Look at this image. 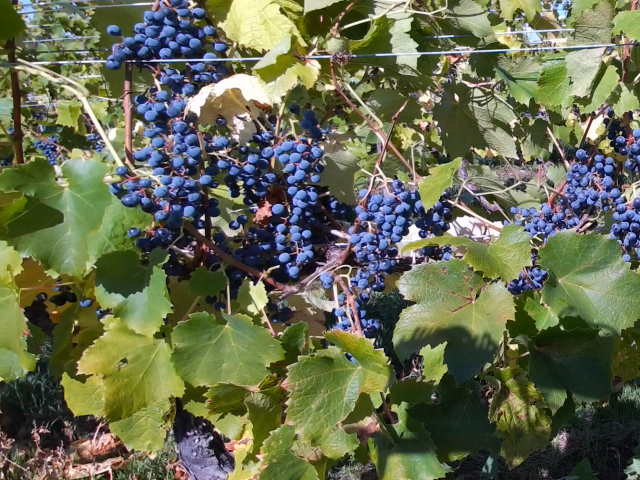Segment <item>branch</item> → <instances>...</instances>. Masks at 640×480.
<instances>
[{
    "label": "branch",
    "mask_w": 640,
    "mask_h": 480,
    "mask_svg": "<svg viewBox=\"0 0 640 480\" xmlns=\"http://www.w3.org/2000/svg\"><path fill=\"white\" fill-rule=\"evenodd\" d=\"M328 72L330 81L333 84L334 89L336 90L341 101L348 106L351 110L357 113L364 122L374 131L377 135L383 140L382 146L377 153L376 162L372 170V174L377 176L381 170L384 156L388 149L394 154L396 158L399 159L400 163L403 165V168L417 181L420 182L422 180V176L415 171V169L410 165L409 161L406 157L397 149L396 145L392 142V134L394 125L402 116V113L407 108V106L412 101L410 96H406L404 100L401 102L400 106L397 110L391 115L387 122L386 132H384L366 113L365 111L358 105H356L353 101H351L344 92V89L341 87L339 80L337 79L336 69H335V60L330 58L328 60Z\"/></svg>",
    "instance_id": "30e6481e"
},
{
    "label": "branch",
    "mask_w": 640,
    "mask_h": 480,
    "mask_svg": "<svg viewBox=\"0 0 640 480\" xmlns=\"http://www.w3.org/2000/svg\"><path fill=\"white\" fill-rule=\"evenodd\" d=\"M184 229L187 232L193 234L196 238H198L202 242H204L207 245H209L212 249H214L216 251V253L226 263H228V264H230V265H232V266H234V267H236V268H238L240 270H243V271H245L247 273H253L254 276H258L259 278H261L264 281H266V282H268V283L280 288L281 290H285L287 288V285L283 281H281V280H279V279H277V278H275L273 276L267 275L265 272H263V271H261V270H259L257 268H254V267H251L249 265H246V264L242 263L241 261H238L235 258H232L231 256H229L221 248V246L218 243H216L210 237L206 236L204 233H202L201 231H199L198 229H196L194 226L190 225L189 223H186L184 225Z\"/></svg>",
    "instance_id": "325d2c04"
},
{
    "label": "branch",
    "mask_w": 640,
    "mask_h": 480,
    "mask_svg": "<svg viewBox=\"0 0 640 480\" xmlns=\"http://www.w3.org/2000/svg\"><path fill=\"white\" fill-rule=\"evenodd\" d=\"M132 82V64H125V80H124V106H125V142L123 160L126 165V169L129 172H133L135 167L133 166L134 144L132 143V104H131V85Z\"/></svg>",
    "instance_id": "170604dd"
},
{
    "label": "branch",
    "mask_w": 640,
    "mask_h": 480,
    "mask_svg": "<svg viewBox=\"0 0 640 480\" xmlns=\"http://www.w3.org/2000/svg\"><path fill=\"white\" fill-rule=\"evenodd\" d=\"M10 84L13 89V100H14V148H15V158L19 165L24 163L23 155H22V146H21V98H20V87H19V77L16 72H13L10 75Z\"/></svg>",
    "instance_id": "45aa463d"
},
{
    "label": "branch",
    "mask_w": 640,
    "mask_h": 480,
    "mask_svg": "<svg viewBox=\"0 0 640 480\" xmlns=\"http://www.w3.org/2000/svg\"><path fill=\"white\" fill-rule=\"evenodd\" d=\"M334 282L338 285V287L341 289V291L344 293V295L346 297L349 313H350V315L352 317V320H353V323H354L355 333L357 335H360L362 333V324H361V321H360V317H359V315H358V313L356 311L355 302H354L351 290L343 282V280L341 279V277L339 275H336L334 277Z\"/></svg>",
    "instance_id": "982ccf7c"
},
{
    "label": "branch",
    "mask_w": 640,
    "mask_h": 480,
    "mask_svg": "<svg viewBox=\"0 0 640 480\" xmlns=\"http://www.w3.org/2000/svg\"><path fill=\"white\" fill-rule=\"evenodd\" d=\"M450 200L454 202L456 205H458L459 207H461L465 212H467L470 216H472L475 220H477L481 225H483L493 233L499 234L501 232V228L499 226H496L495 224L483 218L477 211L471 208L467 203H465L458 196L452 195L450 197Z\"/></svg>",
    "instance_id": "1ff4a987"
},
{
    "label": "branch",
    "mask_w": 640,
    "mask_h": 480,
    "mask_svg": "<svg viewBox=\"0 0 640 480\" xmlns=\"http://www.w3.org/2000/svg\"><path fill=\"white\" fill-rule=\"evenodd\" d=\"M291 93H292V89L288 88L286 90L285 94H284V97L282 98L279 111H278V113L276 115V119H275V122H274V129H275V134L276 135L274 136L273 141H272V145L273 146H276L278 141H279V138H280V135H279L280 134V126L279 125H280V122H281V118H282V116L284 114L285 108H286V103H287Z\"/></svg>",
    "instance_id": "ea751061"
},
{
    "label": "branch",
    "mask_w": 640,
    "mask_h": 480,
    "mask_svg": "<svg viewBox=\"0 0 640 480\" xmlns=\"http://www.w3.org/2000/svg\"><path fill=\"white\" fill-rule=\"evenodd\" d=\"M594 119H595V113H594V112H591V113H590L589 120H588V123H587V125H586V127H585L584 131L582 132V137H581V140H580V147H581V148H584V147H585V143H586L587 135L589 134V132H590V130H591V128H592V126H593Z\"/></svg>",
    "instance_id": "ca6c30ca"
},
{
    "label": "branch",
    "mask_w": 640,
    "mask_h": 480,
    "mask_svg": "<svg viewBox=\"0 0 640 480\" xmlns=\"http://www.w3.org/2000/svg\"><path fill=\"white\" fill-rule=\"evenodd\" d=\"M352 249H353V245L351 243H349L348 247H344L343 252L340 254V256L337 258V260L334 263V267L336 269H339L341 267L342 263L349 256V254L351 253Z\"/></svg>",
    "instance_id": "1d269e1b"
}]
</instances>
